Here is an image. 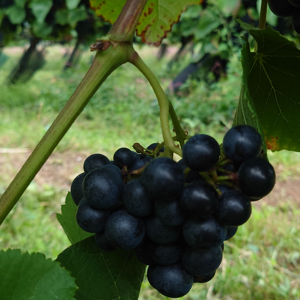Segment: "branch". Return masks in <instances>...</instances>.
Instances as JSON below:
<instances>
[{
	"mask_svg": "<svg viewBox=\"0 0 300 300\" xmlns=\"http://www.w3.org/2000/svg\"><path fill=\"white\" fill-rule=\"evenodd\" d=\"M146 3L147 0H126L108 34L98 38L96 43L91 45L90 52L96 51L92 65L62 111L1 195L0 225L102 83L125 63L133 46L135 28Z\"/></svg>",
	"mask_w": 300,
	"mask_h": 300,
	"instance_id": "30e6481e",
	"label": "branch"
}]
</instances>
